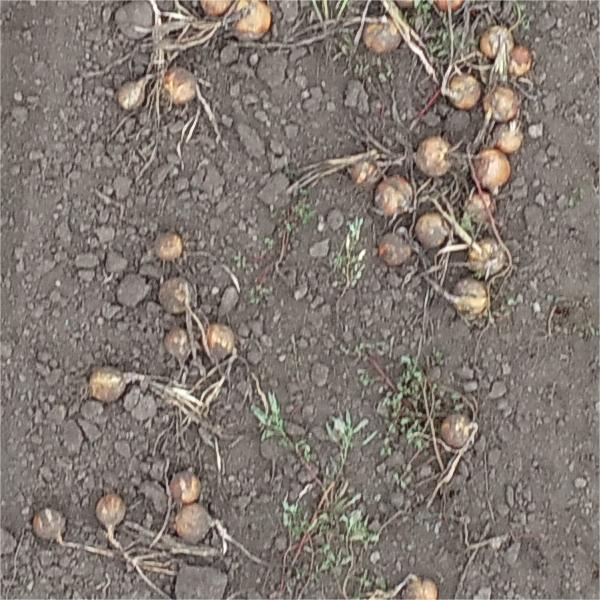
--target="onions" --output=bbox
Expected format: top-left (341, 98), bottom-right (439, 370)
top-left (413, 210), bottom-right (449, 247)
top-left (444, 71), bottom-right (480, 109)
top-left (476, 26), bottom-right (508, 58)
top-left (353, 156), bottom-right (380, 184)
top-left (161, 67), bottom-right (195, 104)
top-left (171, 471), bottom-right (201, 503)
top-left (490, 124), bottom-right (522, 152)
top-left (394, 574), bottom-right (438, 597)
top-left (363, 22), bottom-right (397, 54)
top-left (467, 191), bottom-right (494, 221)
top-left (196, 0), bottom-right (230, 18)
top-left (86, 366), bottom-right (123, 401)
top-left (436, 0), bottom-right (465, 11)
top-left (173, 504), bottom-right (208, 539)
top-left (203, 323), bottom-right (237, 356)
top-left (115, 77), bottom-right (150, 110)
top-left (376, 234), bottom-right (412, 266)
top-left (485, 86), bottom-right (519, 119)
top-left (225, 3), bottom-right (271, 38)
top-left (448, 278), bottom-right (485, 319)
top-left (471, 151), bottom-right (509, 187)
top-left (507, 43), bottom-right (534, 76)
top-left (94, 494), bottom-right (126, 526)
top-left (30, 507), bottom-right (62, 539)
top-left (469, 239), bottom-right (505, 278)
top-left (374, 175), bottom-right (411, 212)
top-left (150, 230), bottom-right (183, 260)
top-left (414, 135), bottom-right (451, 175)
top-left (438, 414), bottom-right (472, 447)
top-left (156, 276), bottom-right (193, 314)
top-left (162, 329), bottom-right (191, 356)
